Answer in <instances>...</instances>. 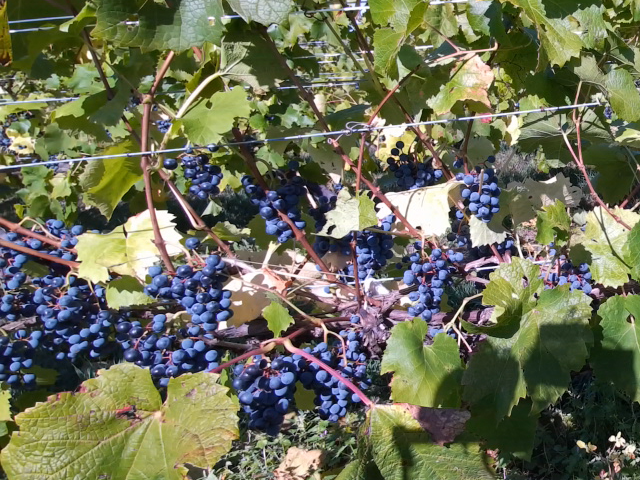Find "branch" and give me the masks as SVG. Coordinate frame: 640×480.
Here are the masks:
<instances>
[{
	"instance_id": "obj_1",
	"label": "branch",
	"mask_w": 640,
	"mask_h": 480,
	"mask_svg": "<svg viewBox=\"0 0 640 480\" xmlns=\"http://www.w3.org/2000/svg\"><path fill=\"white\" fill-rule=\"evenodd\" d=\"M276 213L283 218L288 225L293 229V231L296 233L295 237L296 240L299 241L301 243V245L303 246V248L305 250H307V252L310 254V256L316 261V263L319 265V267L322 269V271L327 275V281L330 283H335L336 286L340 287L341 289L350 292L352 294L355 295L356 298H361L363 299L365 302L370 303L371 305L375 306V307H380L381 303L377 302L376 300L368 297L365 294H361L360 293V279L358 278V267H357V260H356V251L354 249L350 250V254H351V260L352 263L354 264V277H355V281L356 284L354 286V288L342 283L341 281L335 279L334 274L327 268V266L323 263V261L316 255V253L314 252V250L312 249L310 243L307 241V238L303 235V233L300 231V229L296 226V224L291 220V218L284 213L281 209H277Z\"/></svg>"
},
{
	"instance_id": "obj_2",
	"label": "branch",
	"mask_w": 640,
	"mask_h": 480,
	"mask_svg": "<svg viewBox=\"0 0 640 480\" xmlns=\"http://www.w3.org/2000/svg\"><path fill=\"white\" fill-rule=\"evenodd\" d=\"M365 137H366V133H361L360 141H359V147H358V155H357V161H358L357 167L348 159L346 154L343 152V150L341 149V147L337 143V141H336L334 136H328V139L330 140L332 146L335 148V150L338 153V155L345 162V164L356 173V176H355V190L356 191L360 190V179H361L367 185V187L377 197H379L381 199V201L384 203V205L392 212L393 216L395 218H397L399 221H401L406 226V228L409 230V232L412 234V236L416 240H419L420 239L419 234L412 227V225L409 223V221L406 218H404L400 213H398V211L388 201V199L377 188H375V186L370 182V180L366 176H364L362 174V168H363V159H362V157H363V150H364V144H365Z\"/></svg>"
},
{
	"instance_id": "obj_3",
	"label": "branch",
	"mask_w": 640,
	"mask_h": 480,
	"mask_svg": "<svg viewBox=\"0 0 640 480\" xmlns=\"http://www.w3.org/2000/svg\"><path fill=\"white\" fill-rule=\"evenodd\" d=\"M141 173L144 175L143 178V191L145 193V200L147 203V208H148V214H149V220L153 229V232L155 234V239H154V244L157 247L160 256H161V260L164 264V267L169 271V272H173L175 270V267L171 264L169 257H168V253L166 251L165 246V242L163 240V235L160 229V226L158 224V220L156 217V212H155V206H154V200L152 197V182L151 177H152V167L151 164L148 162V157L147 156H142L141 157Z\"/></svg>"
},
{
	"instance_id": "obj_4",
	"label": "branch",
	"mask_w": 640,
	"mask_h": 480,
	"mask_svg": "<svg viewBox=\"0 0 640 480\" xmlns=\"http://www.w3.org/2000/svg\"><path fill=\"white\" fill-rule=\"evenodd\" d=\"M174 57H175V53L173 51H170L168 53V55H167L165 63L163 65V67L161 68L159 74L156 76V78L154 79L153 83L151 84V86L146 91V94L144 96L143 115H142V120H141V139L139 138V136L137 135L136 131L134 130V127L132 126L131 122L128 120V117L126 115H122L121 116V119L123 120L124 124L128 128L132 138L140 146V150L141 151L147 150L148 123H149V117H150L151 98H152L154 92L160 86L161 81L164 79V77L166 76L167 72L169 71V69H170V67H171V65L173 63Z\"/></svg>"
},
{
	"instance_id": "obj_5",
	"label": "branch",
	"mask_w": 640,
	"mask_h": 480,
	"mask_svg": "<svg viewBox=\"0 0 640 480\" xmlns=\"http://www.w3.org/2000/svg\"><path fill=\"white\" fill-rule=\"evenodd\" d=\"M349 320H350L349 316H336V317H331V318H320V319H317V320H313V321L309 322L308 324L302 326L300 329L294 331L293 333H290V334L282 337L278 341H275V342L270 343L268 345L257 347L255 349L249 351L248 353H245V354H242V355H238V356L234 357L233 359H230L229 361H227L225 363L217 365L212 370V373L216 374L220 370H222L224 368H227V367H230L231 365L237 363L238 361L251 358L252 356H254L257 353L264 352V351L266 353H270L273 348L284 344L286 341H289V340L297 337L298 335L304 333L305 331L309 330L310 328H312V327H314L316 325H320V324H323V323H333V322H338V321H349Z\"/></svg>"
},
{
	"instance_id": "obj_6",
	"label": "branch",
	"mask_w": 640,
	"mask_h": 480,
	"mask_svg": "<svg viewBox=\"0 0 640 480\" xmlns=\"http://www.w3.org/2000/svg\"><path fill=\"white\" fill-rule=\"evenodd\" d=\"M159 175L162 177V179L167 183L169 189L171 190L172 193H174L181 201V203L183 204V206L185 207L186 211L189 213L190 217L212 238H214L225 250L226 254L228 255V257L232 260L236 259V256L231 252L229 246L222 240V238L220 236L217 235V233L215 231H212L208 226L205 225L204 222H202V220L194 213V211L191 209V206L189 205V203L186 201L184 195L177 190L174 185L173 182L170 180V178L166 175V173L164 172L163 169H159L158 170Z\"/></svg>"
},
{
	"instance_id": "obj_7",
	"label": "branch",
	"mask_w": 640,
	"mask_h": 480,
	"mask_svg": "<svg viewBox=\"0 0 640 480\" xmlns=\"http://www.w3.org/2000/svg\"><path fill=\"white\" fill-rule=\"evenodd\" d=\"M419 71V67L415 66L413 67L409 72H407L390 90L389 92L380 99V101L377 103V105L375 106L373 113L371 115V117L367 120V125L371 126L372 122L377 118L379 110L381 109V107L384 105L385 102H387L390 98L392 99V101L394 102V104L397 106V108L401 111V113L403 114L404 118L406 119L407 122H414V120L410 117V115L408 114L407 110L404 108V106L400 103L399 99L394 95V93L410 78L414 75V73Z\"/></svg>"
},
{
	"instance_id": "obj_8",
	"label": "branch",
	"mask_w": 640,
	"mask_h": 480,
	"mask_svg": "<svg viewBox=\"0 0 640 480\" xmlns=\"http://www.w3.org/2000/svg\"><path fill=\"white\" fill-rule=\"evenodd\" d=\"M584 110H585V107L580 108V112H579L578 118H577V120H576L577 144H578L579 157H580V168H581V173H582L583 177H584V178H586V184H587V186L591 189V191H592V193H593V195H594V198L597 200V202H598L599 206H600L601 208H603L605 211H607V212H608V214L610 215V217H611L612 219H615L616 221H618V223H620L621 225L625 226V227L627 228V230H630V226H629V224H627L626 222H624L623 220H621V218H619V217L615 216V215L613 214V212H612V211H611L607 206H605V205L602 203V201L600 200L599 196L597 195V193H596V191H595L594 186H593V185L590 183V181H589V180H590V177L585 173L584 166H583L582 143H581V141H580V126H579V123H580V121H581L582 114H583V111H584Z\"/></svg>"
},
{
	"instance_id": "obj_9",
	"label": "branch",
	"mask_w": 640,
	"mask_h": 480,
	"mask_svg": "<svg viewBox=\"0 0 640 480\" xmlns=\"http://www.w3.org/2000/svg\"><path fill=\"white\" fill-rule=\"evenodd\" d=\"M0 245H2L4 247H7V248H10V249H13V250H18L21 253L31 254L32 256H35V257H38V258H41V259H44V260H48V261H52V262H55V263H59V264L70 266V267L74 268V273L75 274L79 273V266H80L79 262L75 263V262H72V261H69V260H66V259L54 257V256L47 255V254H43V253L37 252V251H35V250L31 249V248H26L23 245L12 244V243L7 242V241H5L3 239H0Z\"/></svg>"
},
{
	"instance_id": "obj_10",
	"label": "branch",
	"mask_w": 640,
	"mask_h": 480,
	"mask_svg": "<svg viewBox=\"0 0 640 480\" xmlns=\"http://www.w3.org/2000/svg\"><path fill=\"white\" fill-rule=\"evenodd\" d=\"M0 223L5 225V227L7 229H10V230L15 231L17 233H23V234H25V235H27L29 237H32L34 239H37V240H41L42 243H45V244H48V245H51V246H54V247H57V248H61L62 247V242L61 241L54 240L52 238H49V237L34 233V232H32V231H30V230H28V229H26V228H24L22 226H19V225L15 224V223H12V222L8 221V220H5L2 217H0Z\"/></svg>"
},
{
	"instance_id": "obj_11",
	"label": "branch",
	"mask_w": 640,
	"mask_h": 480,
	"mask_svg": "<svg viewBox=\"0 0 640 480\" xmlns=\"http://www.w3.org/2000/svg\"><path fill=\"white\" fill-rule=\"evenodd\" d=\"M81 33H82V35H83V37H84V39H85V41H86V45H87V47H88V50H89V53H90L91 59H92L93 63H94V64H95V66H96V69H97V71H98V73H99V77L101 78V80H102V82H103L104 86H105V87H106V89H107L108 97H109L110 99H113V98H114V94H113V91H112V87H111V85L109 84V81L107 80L106 75L104 74V70L102 69V66H101V64H100V62H99V60H98V58L96 57L95 50H94V47H93V45H92V42H91L90 36L88 35V33H87V30H86V29H82V30H81Z\"/></svg>"
},
{
	"instance_id": "obj_12",
	"label": "branch",
	"mask_w": 640,
	"mask_h": 480,
	"mask_svg": "<svg viewBox=\"0 0 640 480\" xmlns=\"http://www.w3.org/2000/svg\"><path fill=\"white\" fill-rule=\"evenodd\" d=\"M289 76L291 77V79L295 83V86L297 87L301 97L305 100V102L307 103L308 106L313 108V111H314L316 117L318 118V121L320 122L323 130L324 131H330V128L328 127L326 121L323 119V116L320 113V110H319L317 104L312 102V100L308 97V95L304 91V88L302 87V84L300 83V81L297 78V76L295 75V73L294 72H290Z\"/></svg>"
},
{
	"instance_id": "obj_13",
	"label": "branch",
	"mask_w": 640,
	"mask_h": 480,
	"mask_svg": "<svg viewBox=\"0 0 640 480\" xmlns=\"http://www.w3.org/2000/svg\"><path fill=\"white\" fill-rule=\"evenodd\" d=\"M239 149L244 157V159L246 160L251 173L255 176L257 183L261 186V188L265 191L269 190V186L266 185L262 173L260 172L259 168L257 167L249 149L247 148L246 145H239Z\"/></svg>"
},
{
	"instance_id": "obj_14",
	"label": "branch",
	"mask_w": 640,
	"mask_h": 480,
	"mask_svg": "<svg viewBox=\"0 0 640 480\" xmlns=\"http://www.w3.org/2000/svg\"><path fill=\"white\" fill-rule=\"evenodd\" d=\"M496 51H497L496 47L465 49L463 51L453 52V53L444 54V55H441V56H438V57H434V58L430 59L427 62V65L431 66V65H433V64H435L437 62L444 61V60L451 59V58L465 56L467 54L492 53V52H496Z\"/></svg>"
},
{
	"instance_id": "obj_15",
	"label": "branch",
	"mask_w": 640,
	"mask_h": 480,
	"mask_svg": "<svg viewBox=\"0 0 640 480\" xmlns=\"http://www.w3.org/2000/svg\"><path fill=\"white\" fill-rule=\"evenodd\" d=\"M414 131L419 135V137L421 138L422 142L427 147V149L430 152V155H431L433 161L435 162L436 167L443 173V175L446 178V180L450 181L451 180V174L449 173V171L444 166L443 161L440 160L438 158V156L436 155V152H435L434 148L432 147L431 143L427 140L426 135L422 132V130L419 127H414Z\"/></svg>"
},
{
	"instance_id": "obj_16",
	"label": "branch",
	"mask_w": 640,
	"mask_h": 480,
	"mask_svg": "<svg viewBox=\"0 0 640 480\" xmlns=\"http://www.w3.org/2000/svg\"><path fill=\"white\" fill-rule=\"evenodd\" d=\"M348 17H349L350 22L352 23L354 29L357 31L359 39H360V41L362 42V44L364 46L365 55H366L368 61L370 63H373L374 62V58H373V56H372V54L370 52L369 44H368V42H367V40H366V38H365V36L363 34V31H362L361 27L358 25V23H357V21H356V19L354 17V14L353 13H349Z\"/></svg>"
},
{
	"instance_id": "obj_17",
	"label": "branch",
	"mask_w": 640,
	"mask_h": 480,
	"mask_svg": "<svg viewBox=\"0 0 640 480\" xmlns=\"http://www.w3.org/2000/svg\"><path fill=\"white\" fill-rule=\"evenodd\" d=\"M473 124H474V121L467 123L466 134L464 135V140H463V144H462V147H461L463 170H464L465 174L469 173L466 150H467V147H468L469 139L471 138V129H472Z\"/></svg>"
},
{
	"instance_id": "obj_18",
	"label": "branch",
	"mask_w": 640,
	"mask_h": 480,
	"mask_svg": "<svg viewBox=\"0 0 640 480\" xmlns=\"http://www.w3.org/2000/svg\"><path fill=\"white\" fill-rule=\"evenodd\" d=\"M292 292H293L294 294H296V295H301V296H303V297H305V298L312 299V300H314V301H316V302H322V301H323V298H322V297H319V296L314 295V294L307 293L306 291L299 290V289H297V288H293V289H292Z\"/></svg>"
}]
</instances>
